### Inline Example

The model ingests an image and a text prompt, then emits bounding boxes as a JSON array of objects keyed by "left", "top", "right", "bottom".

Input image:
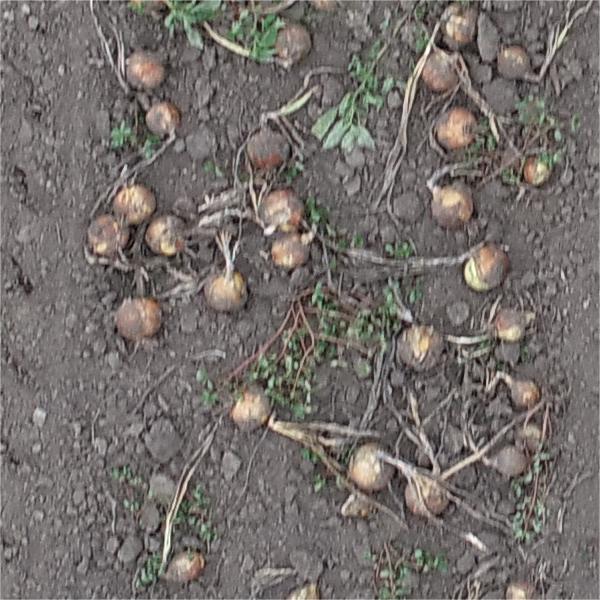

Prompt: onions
[
  {"left": 521, "top": 153, "right": 552, "bottom": 184},
  {"left": 461, "top": 244, "right": 508, "bottom": 290},
  {"left": 504, "top": 577, "right": 530, "bottom": 599},
  {"left": 205, "top": 269, "right": 246, "bottom": 309},
  {"left": 166, "top": 548, "right": 201, "bottom": 581},
  {"left": 420, "top": 53, "right": 460, "bottom": 94},
  {"left": 231, "top": 388, "right": 269, "bottom": 427},
  {"left": 144, "top": 215, "right": 183, "bottom": 255},
  {"left": 493, "top": 307, "right": 525, "bottom": 341},
  {"left": 348, "top": 446, "right": 385, "bottom": 488},
  {"left": 143, "top": 101, "right": 179, "bottom": 136},
  {"left": 405, "top": 473, "right": 449, "bottom": 514},
  {"left": 244, "top": 123, "right": 287, "bottom": 172},
  {"left": 113, "top": 184, "right": 155, "bottom": 223},
  {"left": 257, "top": 187, "right": 302, "bottom": 229},
  {"left": 495, "top": 42, "right": 531, "bottom": 79},
  {"left": 431, "top": 182, "right": 473, "bottom": 224},
  {"left": 395, "top": 324, "right": 437, "bottom": 364},
  {"left": 494, "top": 446, "right": 524, "bottom": 477},
  {"left": 115, "top": 296, "right": 162, "bottom": 339},
  {"left": 276, "top": 21, "right": 311, "bottom": 63},
  {"left": 509, "top": 377, "right": 539, "bottom": 407},
  {"left": 438, "top": 8, "right": 474, "bottom": 47},
  {"left": 124, "top": 50, "right": 164, "bottom": 89},
  {"left": 516, "top": 420, "right": 541, "bottom": 449},
  {"left": 86, "top": 215, "right": 125, "bottom": 257},
  {"left": 432, "top": 106, "right": 478, "bottom": 151},
  {"left": 269, "top": 233, "right": 307, "bottom": 269}
]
